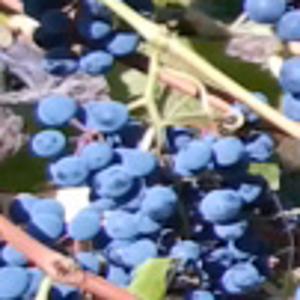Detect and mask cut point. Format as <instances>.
<instances>
[{
    "mask_svg": "<svg viewBox=\"0 0 300 300\" xmlns=\"http://www.w3.org/2000/svg\"><path fill=\"white\" fill-rule=\"evenodd\" d=\"M161 49H162V42L158 41L157 46L154 48V51H153L152 66H151L150 73L148 75V82H147L144 96H142L141 99L137 100V101L140 104H143L144 106L148 105V108H150L152 110L153 109V93H154L153 80H154L155 72H156V70H168L169 72H172L177 75H181L187 79L196 80L201 85V89L203 92V101L207 102L208 101V88H207L206 84L203 81H201V79L199 77L189 74L188 72L178 70L175 67H172L171 65H157V62L160 58Z\"/></svg>",
    "mask_w": 300,
    "mask_h": 300,
    "instance_id": "6a23745f",
    "label": "cut point"
}]
</instances>
